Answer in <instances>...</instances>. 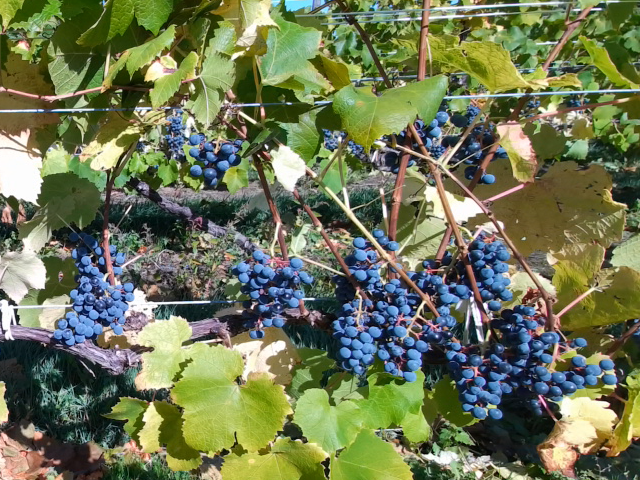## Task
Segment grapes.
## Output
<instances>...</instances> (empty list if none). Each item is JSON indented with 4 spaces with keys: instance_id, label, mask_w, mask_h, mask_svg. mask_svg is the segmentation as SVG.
<instances>
[{
    "instance_id": "obj_1",
    "label": "grapes",
    "mask_w": 640,
    "mask_h": 480,
    "mask_svg": "<svg viewBox=\"0 0 640 480\" xmlns=\"http://www.w3.org/2000/svg\"><path fill=\"white\" fill-rule=\"evenodd\" d=\"M356 249L353 255H347L344 259L354 277L359 281H366L367 290L375 296L384 293L396 294V304L390 305L388 301H377L376 310L370 313L361 312L359 328L356 317L359 312V300L352 298L342 308L336 311L335 319L331 323L332 337L340 340L343 346L336 352V358L341 361L344 370H353L358 375L366 372L364 364H372L375 355L379 360L388 361L391 354L397 358L407 357V368L410 371L398 369L395 362H387L384 371L389 374L402 376L409 382L416 380V373L422 365L423 358L428 351L430 343H438L453 350L446 352L448 368L455 372L456 387L459 391V402L464 412H470L477 419L486 416V410L480 403L491 406L501 405V396L511 395L513 388L521 384L531 386L537 395H545L548 400L561 401L563 395L571 397L579 388L596 386L597 375L603 370L614 371L615 362L612 359H603L598 364H587L583 356H573L571 364L574 367H583L584 376L573 370L551 372L545 363L550 365L554 361L553 353L548 350L552 344L560 342V334L557 331H545L535 337L530 330L538 327L535 319V309L532 306L517 304L513 309L506 308L500 312L503 319H495L492 326L495 331L504 333L501 343H492L489 346V363L496 367L490 368L484 364L479 354L459 352L463 345L458 341H451L452 332L443 331V328H455L457 319L451 314V306L462 300L471 298L472 286L468 271L465 270L463 260H456L455 266L450 268V273L443 283L441 275H427L425 271H407V276L416 282L429 296H437L436 304L439 316L436 320L429 321L423 326L422 339H414L406 336L407 326L415 315L416 307L422 298L416 293H409L402 287V281L395 278L384 285L378 271L381 269L377 259V253L369 249L372 245L362 236L353 240ZM371 318L377 325L388 323L386 329L379 326H370ZM389 335L393 339L404 338L402 346L393 341L382 340L379 347L373 343L374 339ZM478 367L481 377H475V372L470 367H462L464 364Z\"/></svg>"
},
{
    "instance_id": "obj_2",
    "label": "grapes",
    "mask_w": 640,
    "mask_h": 480,
    "mask_svg": "<svg viewBox=\"0 0 640 480\" xmlns=\"http://www.w3.org/2000/svg\"><path fill=\"white\" fill-rule=\"evenodd\" d=\"M91 250L80 243L72 251V258L77 260L75 266L81 274L74 277L79 283L77 289L70 291V298L74 304L73 311L66 313V319L57 320V328L53 331L56 340L65 338L67 345L83 343L86 338L104 333L103 327L109 326L115 335L123 333L126 323V312L130 306L127 301H133L134 286L131 282L111 285L109 278L102 281L104 274L97 266H93L87 255Z\"/></svg>"
},
{
    "instance_id": "obj_3",
    "label": "grapes",
    "mask_w": 640,
    "mask_h": 480,
    "mask_svg": "<svg viewBox=\"0 0 640 480\" xmlns=\"http://www.w3.org/2000/svg\"><path fill=\"white\" fill-rule=\"evenodd\" d=\"M252 258L256 260L253 267L246 262H238L233 267V272L237 274V279L244 284L240 287L242 294H247L252 299H258V304L254 307V312L260 314L263 318L261 325L263 327L283 328L286 325V319L281 316L284 306L289 308H297L298 300L304 296L302 289L291 288V284L312 283L314 276L302 271L303 260L301 258H292L288 261V266L276 268L274 271L268 267L271 256L263 251L255 250ZM269 281H275V286L268 288V294H261L260 289L269 286Z\"/></svg>"
},
{
    "instance_id": "obj_4",
    "label": "grapes",
    "mask_w": 640,
    "mask_h": 480,
    "mask_svg": "<svg viewBox=\"0 0 640 480\" xmlns=\"http://www.w3.org/2000/svg\"><path fill=\"white\" fill-rule=\"evenodd\" d=\"M485 238L486 233L481 231L471 242L467 258L473 267L481 300H490L487 308L490 311H499L502 303L497 299L503 302L513 299V292L506 288L511 285V279L503 277V273L509 270L507 261L510 259V253L501 241L484 243Z\"/></svg>"
},
{
    "instance_id": "obj_5",
    "label": "grapes",
    "mask_w": 640,
    "mask_h": 480,
    "mask_svg": "<svg viewBox=\"0 0 640 480\" xmlns=\"http://www.w3.org/2000/svg\"><path fill=\"white\" fill-rule=\"evenodd\" d=\"M242 143L243 140L241 138L233 142L229 141L228 143L221 141L215 153H213L215 146L212 143H205L203 150H199L197 147L191 148L189 150L191 157L202 161L204 165L215 163V167H207L203 172L201 165L193 164L189 167V173L193 177H198L203 174V179L207 181L210 186L216 185L225 174V170L241 162L239 150Z\"/></svg>"
},
{
    "instance_id": "obj_6",
    "label": "grapes",
    "mask_w": 640,
    "mask_h": 480,
    "mask_svg": "<svg viewBox=\"0 0 640 480\" xmlns=\"http://www.w3.org/2000/svg\"><path fill=\"white\" fill-rule=\"evenodd\" d=\"M483 158L484 150L474 134H470L465 142L461 143L453 153V159L455 161L463 160L465 165H473L468 166L464 170V176L467 180H471L474 173L478 170V167L474 165L476 161H480Z\"/></svg>"
},
{
    "instance_id": "obj_7",
    "label": "grapes",
    "mask_w": 640,
    "mask_h": 480,
    "mask_svg": "<svg viewBox=\"0 0 640 480\" xmlns=\"http://www.w3.org/2000/svg\"><path fill=\"white\" fill-rule=\"evenodd\" d=\"M448 121V113L446 111H438L434 114V120L427 128H425L422 120H416L414 122V127L420 135L425 148H429L432 145L431 137H438L441 134V128L439 125L445 124Z\"/></svg>"
},
{
    "instance_id": "obj_8",
    "label": "grapes",
    "mask_w": 640,
    "mask_h": 480,
    "mask_svg": "<svg viewBox=\"0 0 640 480\" xmlns=\"http://www.w3.org/2000/svg\"><path fill=\"white\" fill-rule=\"evenodd\" d=\"M375 240L381 245H385L388 250L392 252L397 251L400 248V243L397 240H391L389 236L385 234V231L382 228H377L372 232Z\"/></svg>"
},
{
    "instance_id": "obj_9",
    "label": "grapes",
    "mask_w": 640,
    "mask_h": 480,
    "mask_svg": "<svg viewBox=\"0 0 640 480\" xmlns=\"http://www.w3.org/2000/svg\"><path fill=\"white\" fill-rule=\"evenodd\" d=\"M109 253L112 256L111 259L116 266H120L125 263L126 255L122 251H117V247L115 245H111L109 247ZM116 266L112 267V273L114 275H121L123 273V269Z\"/></svg>"
},
{
    "instance_id": "obj_10",
    "label": "grapes",
    "mask_w": 640,
    "mask_h": 480,
    "mask_svg": "<svg viewBox=\"0 0 640 480\" xmlns=\"http://www.w3.org/2000/svg\"><path fill=\"white\" fill-rule=\"evenodd\" d=\"M84 241L86 242V244L92 249L94 250V253L97 256H100L97 260V263L99 265L105 266L107 264L106 259L104 256H102L104 254V249L102 247H99V242L96 238H93L90 235H86L84 237Z\"/></svg>"
}]
</instances>
